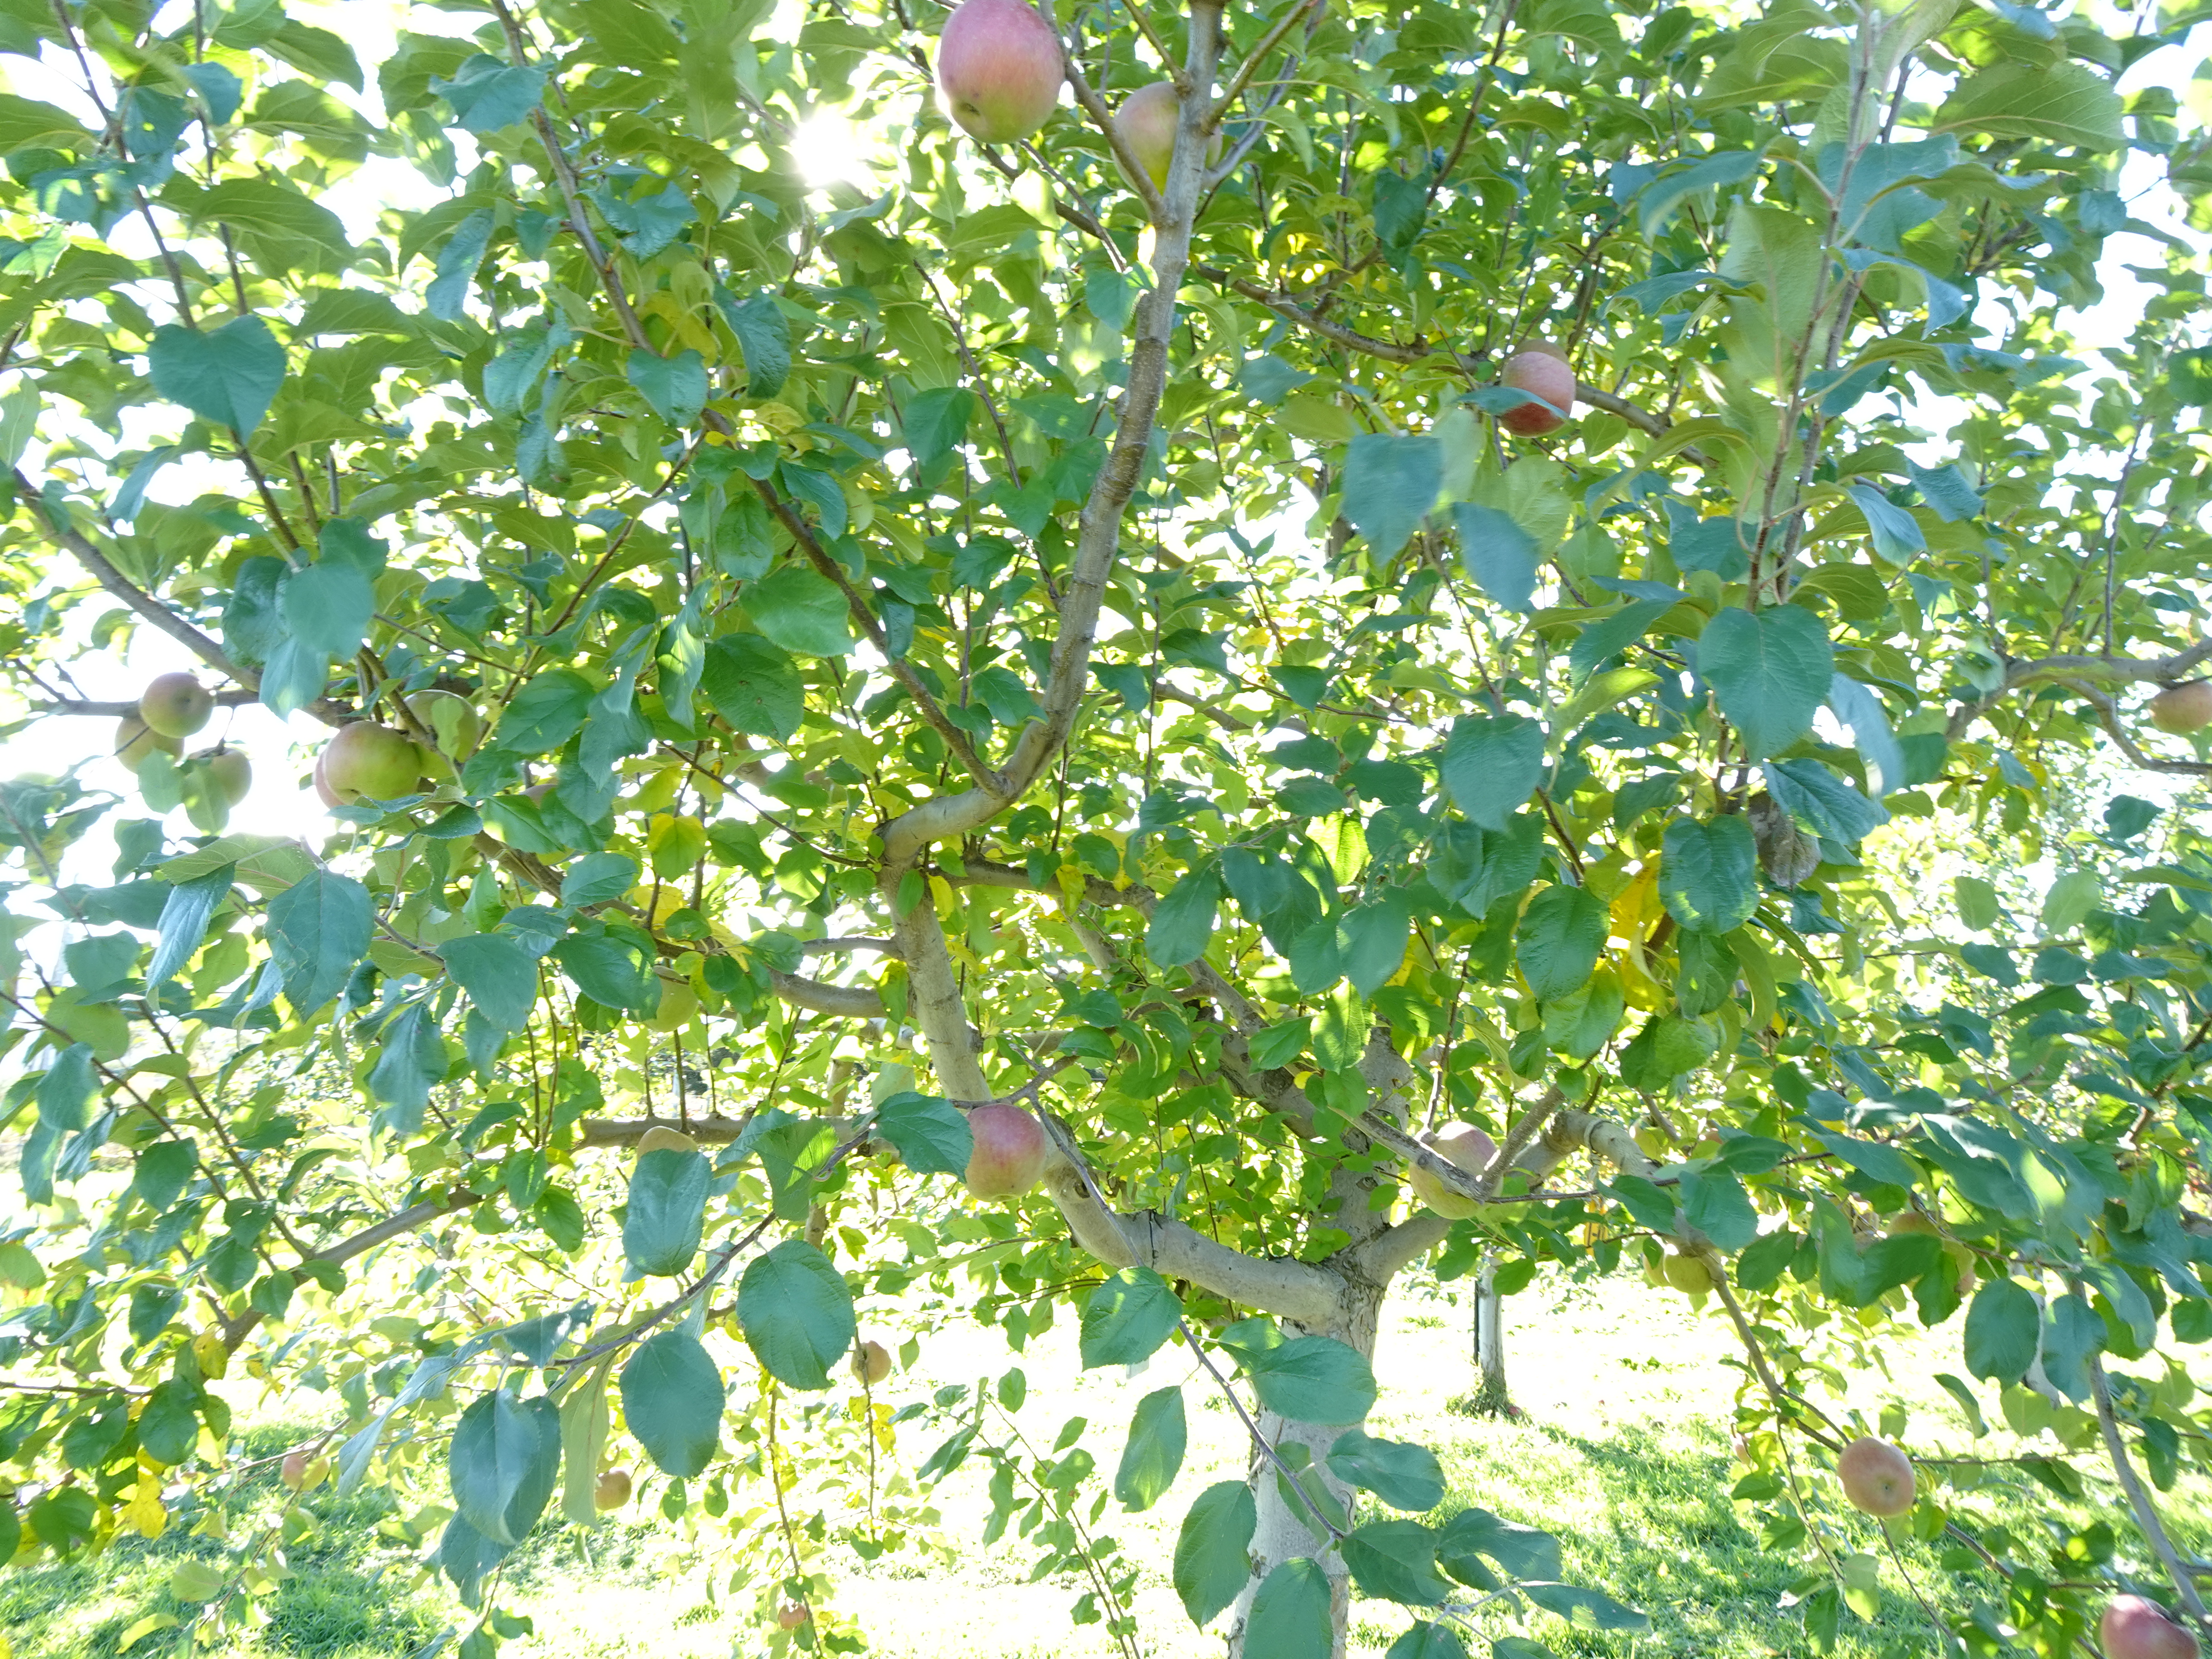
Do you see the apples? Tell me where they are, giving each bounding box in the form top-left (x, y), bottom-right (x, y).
top-left (850, 1340), bottom-right (892, 1384)
top-left (987, 925), bottom-right (1029, 971)
top-left (2101, 1592), bottom-right (2205, 1659)
top-left (1885, 1210), bottom-right (1947, 1270)
top-left (1115, 80), bottom-right (1223, 202)
top-left (2147, 679), bottom-right (2212, 735)
top-left (1545, 1178), bottom-right (1567, 1198)
top-left (322, 720), bottom-right (422, 811)
top-left (1393, 532), bottom-right (1421, 563)
top-left (1327, 537), bottom-right (1364, 567)
top-left (1697, 1126), bottom-right (1737, 1168)
top-left (1850, 1128), bottom-right (1868, 1150)
top-left (589, 1467), bottom-right (634, 1512)
top-left (313, 748), bottom-right (390, 821)
top-left (139, 671), bottom-right (216, 740)
top-left (1662, 1236), bottom-right (1725, 1297)
top-left (1407, 1121), bottom-right (1505, 1221)
top-left (1633, 1113), bottom-right (1678, 1156)
top-left (634, 965), bottom-right (699, 1034)
top-left (1511, 338), bottom-right (1572, 396)
top-left (1939, 1258), bottom-right (1978, 1298)
top-left (1302, 0), bottom-right (1327, 25)
top-left (513, 785), bottom-right (585, 866)
top-left (1498, 351), bottom-right (1576, 437)
top-left (1850, 1231), bottom-right (1883, 1270)
top-left (1853, 1208), bottom-right (1881, 1234)
top-left (1825, 1164), bottom-right (1835, 1174)
top-left (1642, 1240), bottom-right (1690, 1289)
top-left (2187, 1178), bottom-right (2202, 1195)
top-left (1240, 669), bottom-right (1266, 691)
top-left (801, 768), bottom-right (848, 810)
top-left (1835, 1435), bottom-right (1918, 1519)
top-left (1011, 690), bottom-right (1047, 727)
top-left (777, 1602), bottom-right (807, 1633)
top-left (394, 691), bottom-right (482, 779)
top-left (2185, 1150), bottom-right (2201, 1162)
top-left (1176, 1054), bottom-right (1219, 1092)
top-left (935, 0), bottom-right (1067, 144)
top-left (1219, 1209), bottom-right (1245, 1239)
top-left (634, 1125), bottom-right (701, 1186)
top-left (182, 746), bottom-right (252, 809)
top-left (484, 1315), bottom-right (510, 1343)
top-left (165, 1471), bottom-right (208, 1512)
top-left (115, 713), bottom-right (185, 779)
top-left (281, 1441), bottom-right (330, 1493)
top-left (959, 1102), bottom-right (1049, 1203)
